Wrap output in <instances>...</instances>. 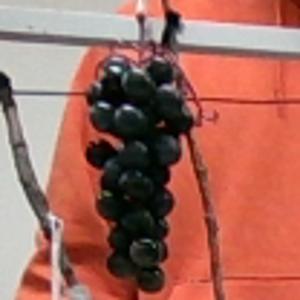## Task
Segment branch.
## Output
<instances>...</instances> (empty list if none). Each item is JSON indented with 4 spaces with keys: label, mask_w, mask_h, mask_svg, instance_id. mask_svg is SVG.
<instances>
[{
    "label": "branch",
    "mask_w": 300,
    "mask_h": 300,
    "mask_svg": "<svg viewBox=\"0 0 300 300\" xmlns=\"http://www.w3.org/2000/svg\"><path fill=\"white\" fill-rule=\"evenodd\" d=\"M0 107L8 131V144L16 169L17 182L22 187L25 200L43 232V237L53 245L60 272L70 289L71 300H88L83 286H80L74 268L66 258L57 235L56 225L49 214V201L41 188L30 159V150L18 115L12 78L0 68Z\"/></svg>",
    "instance_id": "1"
},
{
    "label": "branch",
    "mask_w": 300,
    "mask_h": 300,
    "mask_svg": "<svg viewBox=\"0 0 300 300\" xmlns=\"http://www.w3.org/2000/svg\"><path fill=\"white\" fill-rule=\"evenodd\" d=\"M194 126L185 138L190 155L193 174L197 181L198 190L203 207L204 227L207 233V246L210 256V279L213 286V300H227V293L223 283L222 254L219 248V227L215 216L211 192L207 185V167L203 164L202 156L198 152L195 138L193 137Z\"/></svg>",
    "instance_id": "2"
},
{
    "label": "branch",
    "mask_w": 300,
    "mask_h": 300,
    "mask_svg": "<svg viewBox=\"0 0 300 300\" xmlns=\"http://www.w3.org/2000/svg\"><path fill=\"white\" fill-rule=\"evenodd\" d=\"M161 8L164 14V26L159 39L160 53L176 67V90L179 89L188 96L183 67L174 55L175 41L181 28L182 14L175 7L171 8L169 3H161Z\"/></svg>",
    "instance_id": "3"
}]
</instances>
